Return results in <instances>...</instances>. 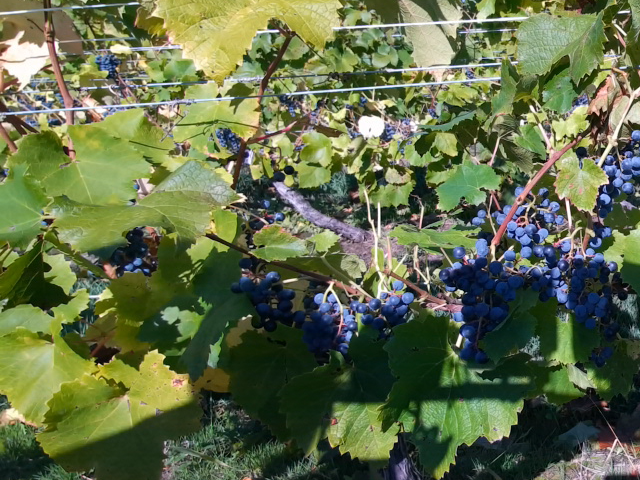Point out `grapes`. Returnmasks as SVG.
Instances as JSON below:
<instances>
[{
  "mask_svg": "<svg viewBox=\"0 0 640 480\" xmlns=\"http://www.w3.org/2000/svg\"><path fill=\"white\" fill-rule=\"evenodd\" d=\"M526 209L518 207L512 221L505 230V236L509 240H514L521 244L519 255L524 259L531 256L536 258H545L546 265H542L540 270L533 268L530 275L534 279L531 282V291L538 294L541 302H547L550 297H555L558 304L565 303L567 310L575 307L574 323L577 326H583L587 330H592L599 325L598 319H606L610 311V301L612 300V289L605 287L603 295L598 291L590 292L587 297L582 299L581 305L576 306V300L581 296L583 286L586 284L587 277H595L599 271V279L602 283L609 281V271L615 272L617 264L614 261L607 263L604 261L602 253H596L595 249H599L603 245L604 238L610 239L613 231L608 225H602L599 222L593 224V230L596 233L594 237L589 239L590 248L585 250L587 256H593L588 265L584 267L585 259L580 251L573 253L571 265L574 267L572 276L570 277V285L572 291L567 293L568 284L561 276V271H566L569 263L566 260L558 261L556 249L551 245L542 244L549 237L550 231L547 227L539 229L534 223H527L524 227L517 226L519 216L524 214Z\"/></svg>",
  "mask_w": 640,
  "mask_h": 480,
  "instance_id": "1",
  "label": "grapes"
},
{
  "mask_svg": "<svg viewBox=\"0 0 640 480\" xmlns=\"http://www.w3.org/2000/svg\"><path fill=\"white\" fill-rule=\"evenodd\" d=\"M281 279L278 271H269L265 278L259 281V284L252 282L250 277H243L238 282L231 284V291L234 294L246 293V299L251 301L256 308L257 313L263 318L268 319L264 323V329L267 332H275L277 324H283L286 328L293 326L297 330H301L304 334L302 342L308 346L311 354H319L323 349L330 348L336 342V350L343 356L349 351L350 340L353 332L357 329L355 316L350 314L348 309L342 311L343 326L342 335H338V326L333 323L331 315L340 311V305L333 293H329L324 302V294L316 292L313 296H306L303 302V308L306 311L318 310L310 315L311 320L305 321V313L303 311H295L293 313V300L295 292L292 289H285L282 284H275Z\"/></svg>",
  "mask_w": 640,
  "mask_h": 480,
  "instance_id": "2",
  "label": "grapes"
},
{
  "mask_svg": "<svg viewBox=\"0 0 640 480\" xmlns=\"http://www.w3.org/2000/svg\"><path fill=\"white\" fill-rule=\"evenodd\" d=\"M477 255L461 264L455 261L452 267L439 271L440 281L444 284V290L453 293L458 289L465 291L461 295L462 308L453 314L456 323L473 321L481 316H489V322L484 326L486 333H492L498 323L509 315V305L516 298V291L523 285L522 276H513L510 272H504L499 261H492L488 269L487 256L490 253L488 242L480 238L475 242ZM496 295H501L504 302L491 308L489 302H478L476 295H482L486 290H493Z\"/></svg>",
  "mask_w": 640,
  "mask_h": 480,
  "instance_id": "3",
  "label": "grapes"
},
{
  "mask_svg": "<svg viewBox=\"0 0 640 480\" xmlns=\"http://www.w3.org/2000/svg\"><path fill=\"white\" fill-rule=\"evenodd\" d=\"M624 157L626 159L621 162L620 168L615 164L614 155H608L605 158L603 171L610 177L611 182L602 187L603 192L597 199V214L602 219H605L613 209L611 197L616 198L621 193L627 195L636 193L634 184L626 181H629L632 176H640V157L633 155L631 151H626Z\"/></svg>",
  "mask_w": 640,
  "mask_h": 480,
  "instance_id": "4",
  "label": "grapes"
},
{
  "mask_svg": "<svg viewBox=\"0 0 640 480\" xmlns=\"http://www.w3.org/2000/svg\"><path fill=\"white\" fill-rule=\"evenodd\" d=\"M382 300H387L382 306L380 299H371L368 303V308L371 311H377L382 307V315L387 317L389 324L403 325L405 323V317L403 316L408 310V305L415 300V294L413 292H406L398 297L392 294L389 295L386 292L380 294Z\"/></svg>",
  "mask_w": 640,
  "mask_h": 480,
  "instance_id": "5",
  "label": "grapes"
},
{
  "mask_svg": "<svg viewBox=\"0 0 640 480\" xmlns=\"http://www.w3.org/2000/svg\"><path fill=\"white\" fill-rule=\"evenodd\" d=\"M478 325L476 323L464 324L460 329V337L467 339L464 342V348L459 352L461 361H473L477 365H486L489 362V356L480 348L478 341Z\"/></svg>",
  "mask_w": 640,
  "mask_h": 480,
  "instance_id": "6",
  "label": "grapes"
},
{
  "mask_svg": "<svg viewBox=\"0 0 640 480\" xmlns=\"http://www.w3.org/2000/svg\"><path fill=\"white\" fill-rule=\"evenodd\" d=\"M538 196L541 199H544L540 204L542 209H546L547 207L552 213H546L544 210H540L538 215L543 217V220L546 223H555L556 225H562L564 223V217L561 214H557L556 216L553 213H556L560 209V203L556 200H551L548 197L550 196V190L547 187H541L538 190Z\"/></svg>",
  "mask_w": 640,
  "mask_h": 480,
  "instance_id": "7",
  "label": "grapes"
},
{
  "mask_svg": "<svg viewBox=\"0 0 640 480\" xmlns=\"http://www.w3.org/2000/svg\"><path fill=\"white\" fill-rule=\"evenodd\" d=\"M612 355V349L610 347H605L602 352L599 353H594L592 355V360L594 361V364L598 367H603L606 362L610 359V356Z\"/></svg>",
  "mask_w": 640,
  "mask_h": 480,
  "instance_id": "8",
  "label": "grapes"
},
{
  "mask_svg": "<svg viewBox=\"0 0 640 480\" xmlns=\"http://www.w3.org/2000/svg\"><path fill=\"white\" fill-rule=\"evenodd\" d=\"M510 205H511V204H505V205L503 206V211H502V212H501V211H494V212L492 213V217H493L494 219H496V223H497L498 225H500V224H501L502 220H503V219H504V217L506 216V214H507V212H508V210H509V208H510Z\"/></svg>",
  "mask_w": 640,
  "mask_h": 480,
  "instance_id": "9",
  "label": "grapes"
}]
</instances>
